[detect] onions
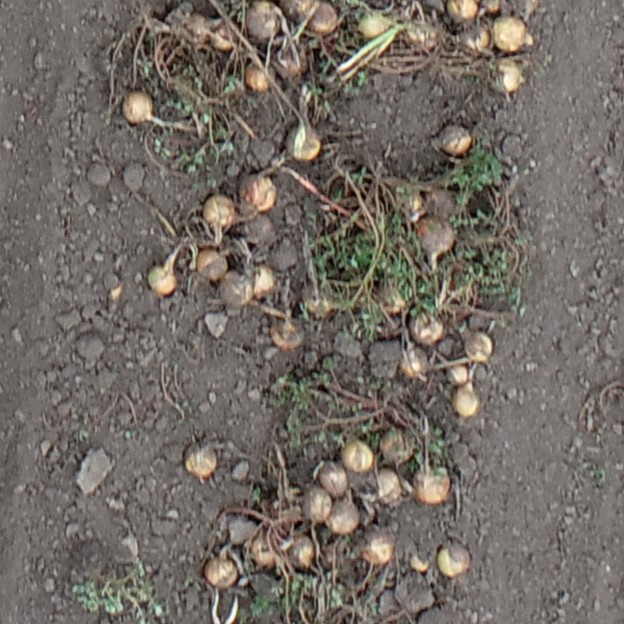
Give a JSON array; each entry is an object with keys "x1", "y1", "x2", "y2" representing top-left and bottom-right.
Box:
[
  {"x1": 362, "y1": 531, "x2": 396, "y2": 563},
  {"x1": 180, "y1": 440, "x2": 216, "y2": 478},
  {"x1": 200, "y1": 192, "x2": 234, "y2": 229},
  {"x1": 287, "y1": 537, "x2": 316, "y2": 567},
  {"x1": 415, "y1": 218, "x2": 455, "y2": 256},
  {"x1": 326, "y1": 497, "x2": 361, "y2": 532},
  {"x1": 244, "y1": 3, "x2": 282, "y2": 42},
  {"x1": 250, "y1": 533, "x2": 282, "y2": 568},
  {"x1": 434, "y1": 542, "x2": 470, "y2": 577},
  {"x1": 397, "y1": 346, "x2": 427, "y2": 377},
  {"x1": 436, "y1": 125, "x2": 471, "y2": 156},
  {"x1": 408, "y1": 551, "x2": 430, "y2": 572},
  {"x1": 376, "y1": 429, "x2": 408, "y2": 463},
  {"x1": 202, "y1": 555, "x2": 237, "y2": 587},
  {"x1": 195, "y1": 248, "x2": 226, "y2": 279},
  {"x1": 341, "y1": 441, "x2": 373, "y2": 471},
  {"x1": 409, "y1": 312, "x2": 443, "y2": 343},
  {"x1": 412, "y1": 468, "x2": 450, "y2": 502},
  {"x1": 401, "y1": 189, "x2": 424, "y2": 215},
  {"x1": 243, "y1": 65, "x2": 271, "y2": 90},
  {"x1": 305, "y1": 294, "x2": 335, "y2": 319},
  {"x1": 239, "y1": 175, "x2": 275, "y2": 211},
  {"x1": 404, "y1": 15, "x2": 439, "y2": 53},
  {"x1": 268, "y1": 312, "x2": 301, "y2": 350},
  {"x1": 180, "y1": 12, "x2": 208, "y2": 42},
  {"x1": 248, "y1": 265, "x2": 276, "y2": 297},
  {"x1": 490, "y1": 16, "x2": 526, "y2": 52},
  {"x1": 458, "y1": 20, "x2": 491, "y2": 52},
  {"x1": 146, "y1": 264, "x2": 176, "y2": 294},
  {"x1": 494, "y1": 62, "x2": 523, "y2": 91},
  {"x1": 301, "y1": 489, "x2": 332, "y2": 522},
  {"x1": 315, "y1": 462, "x2": 347, "y2": 496},
  {"x1": 446, "y1": 0, "x2": 478, "y2": 24},
  {"x1": 241, "y1": 210, "x2": 275, "y2": 244},
  {"x1": 380, "y1": 284, "x2": 410, "y2": 314},
  {"x1": 355, "y1": 8, "x2": 392, "y2": 38},
  {"x1": 429, "y1": 185, "x2": 458, "y2": 216},
  {"x1": 269, "y1": 237, "x2": 299, "y2": 268},
  {"x1": 461, "y1": 331, "x2": 491, "y2": 360},
  {"x1": 121, "y1": 90, "x2": 153, "y2": 122},
  {"x1": 209, "y1": 27, "x2": 236, "y2": 51},
  {"x1": 271, "y1": 41, "x2": 306, "y2": 77},
  {"x1": 374, "y1": 468, "x2": 403, "y2": 502},
  {"x1": 287, "y1": 126, "x2": 322, "y2": 160},
  {"x1": 218, "y1": 271, "x2": 252, "y2": 306},
  {"x1": 449, "y1": 361, "x2": 471, "y2": 386},
  {"x1": 449, "y1": 387, "x2": 480, "y2": 417},
  {"x1": 307, "y1": 4, "x2": 337, "y2": 32},
  {"x1": 285, "y1": 1, "x2": 317, "y2": 23}
]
